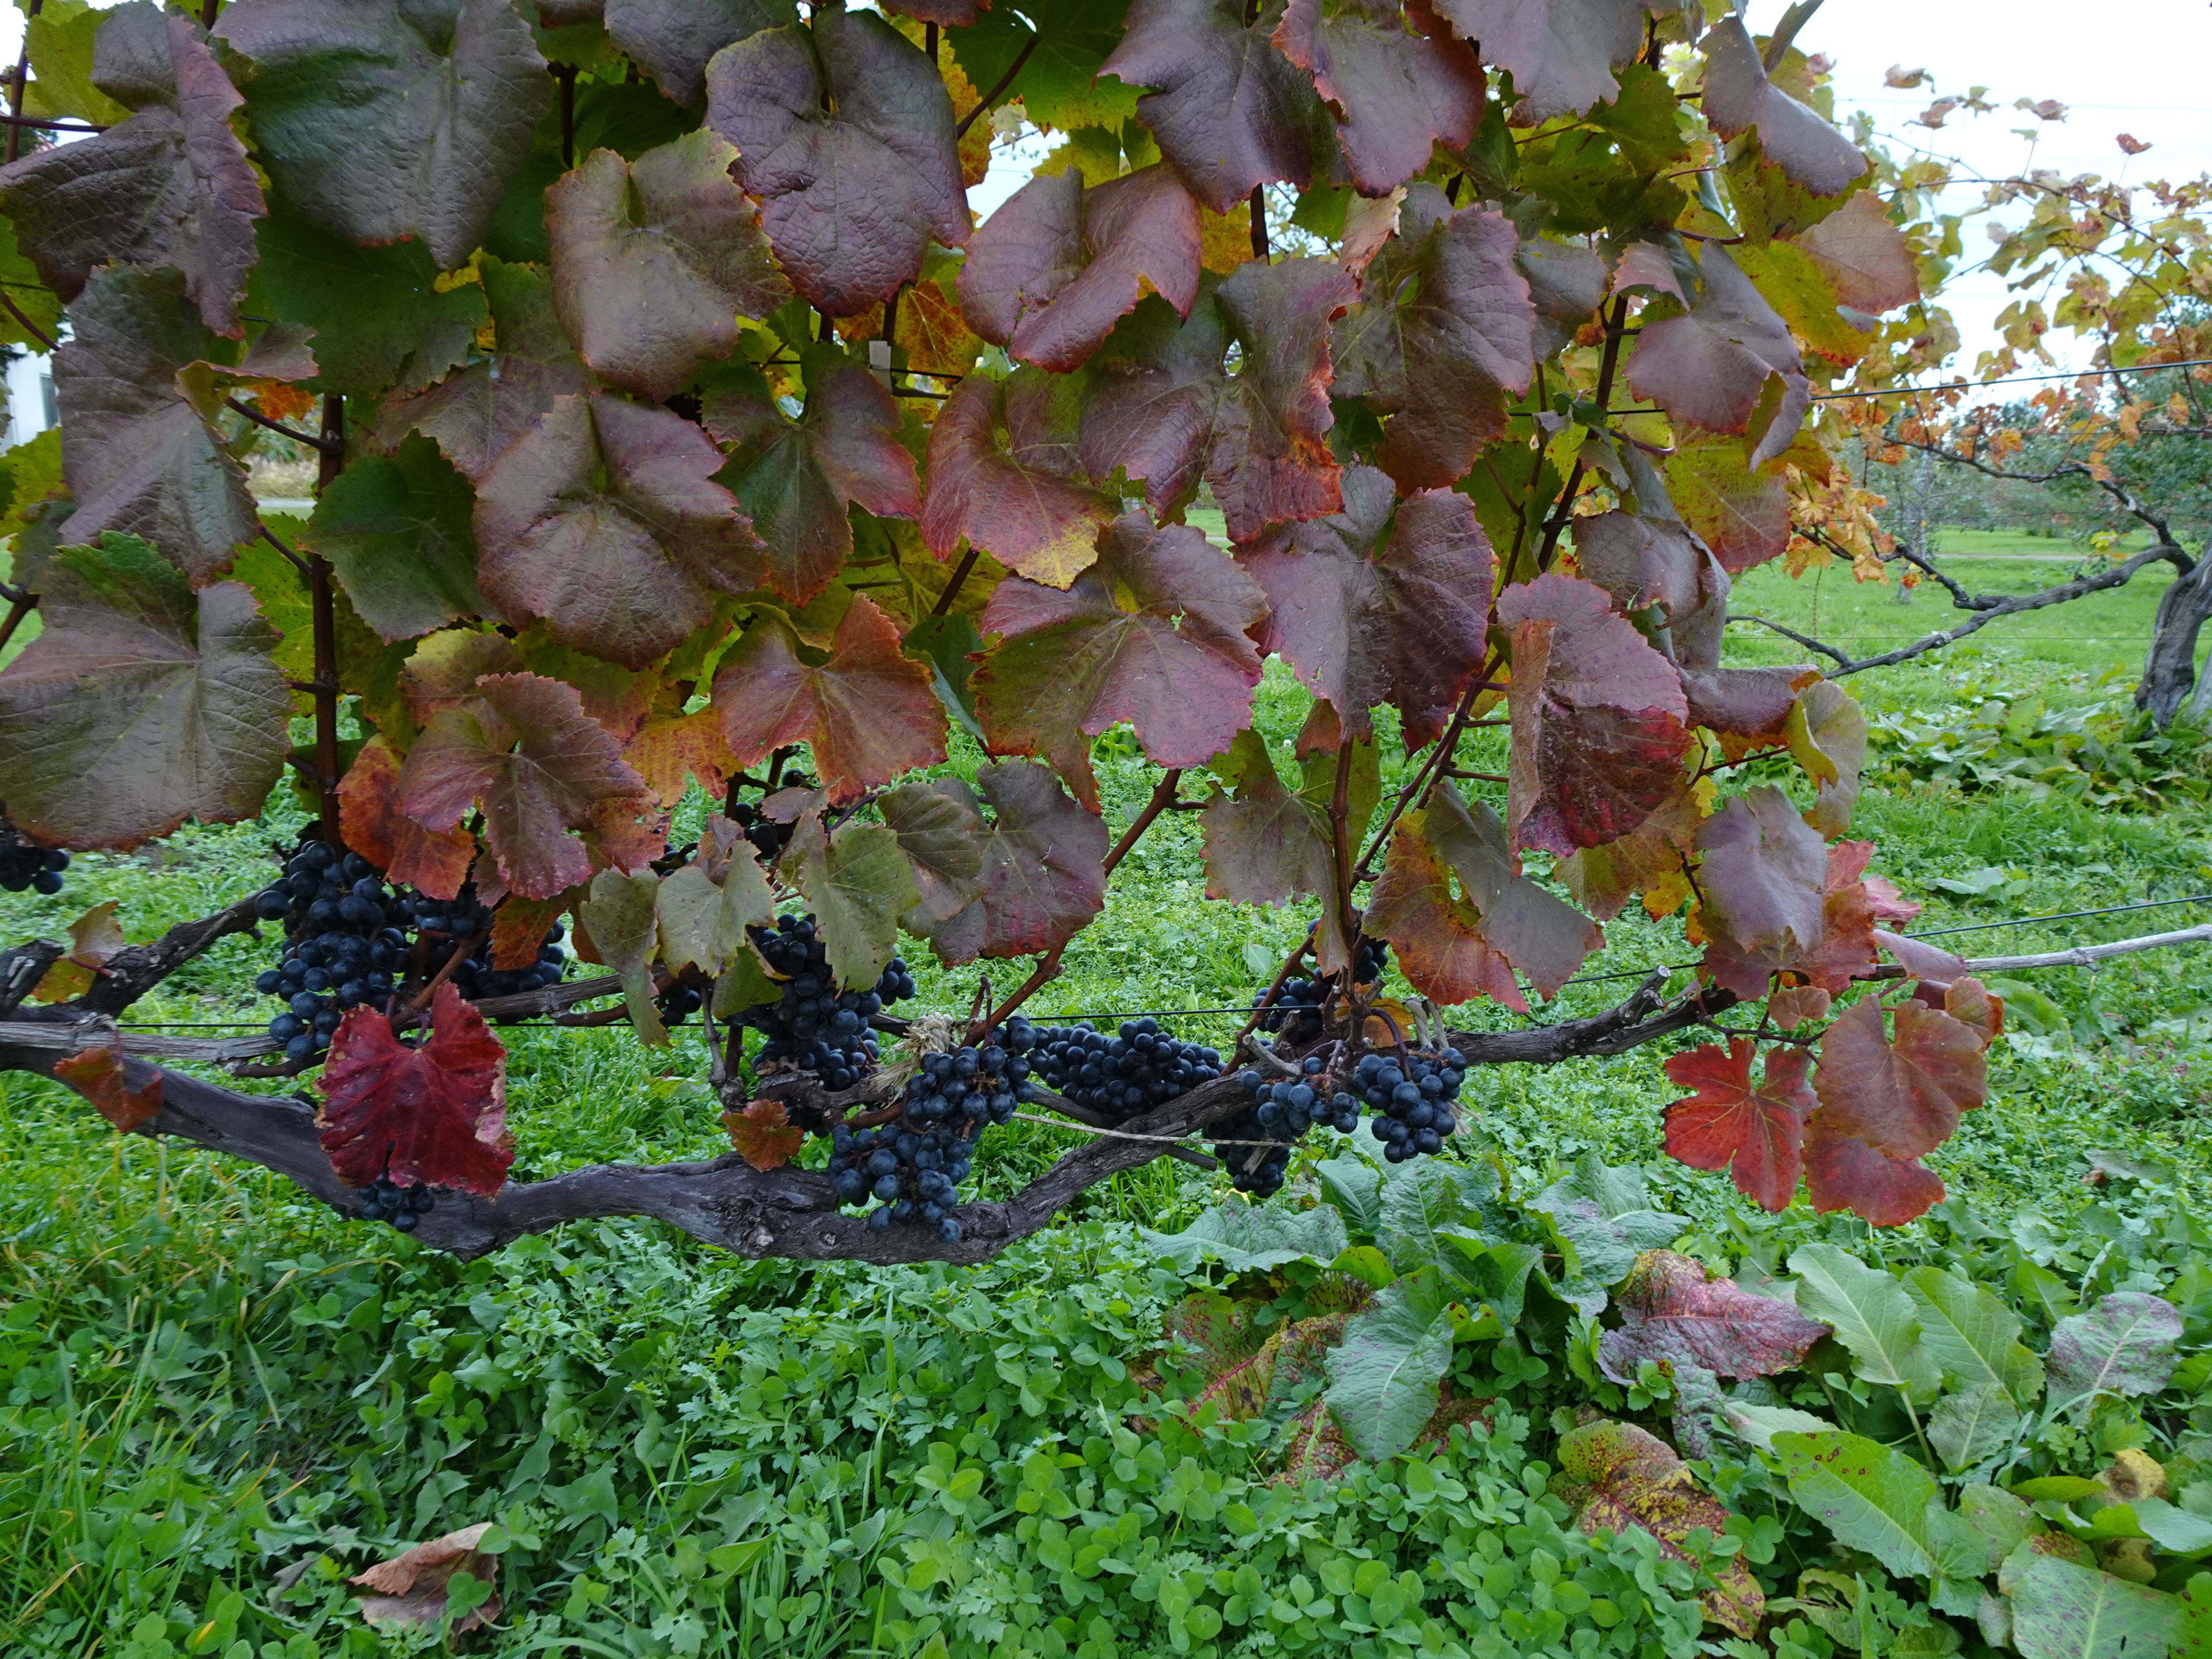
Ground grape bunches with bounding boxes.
[861,1026,880,1062]
[255,928,419,1070]
[474,909,565,1027]
[935,1125,981,1185]
[1352,1046,1468,1163]
[352,1037,445,1234]
[623,845,726,1028]
[1251,974,1330,1048]
[254,839,392,955]
[0,841,68,894]
[754,1039,863,1136]
[1245,1037,1273,1064]
[1226,1056,1230,1060]
[826,1124,901,1207]
[1307,903,1390,985]
[870,1120,962,1241]
[874,946,917,1005]
[905,1016,1036,1127]
[392,864,491,1012]
[1202,1101,1298,1197]
[1026,1021,1160,1126]
[1242,1057,1361,1138]
[731,769,847,859]
[1111,1017,1227,1100]
[725,912,882,1044]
